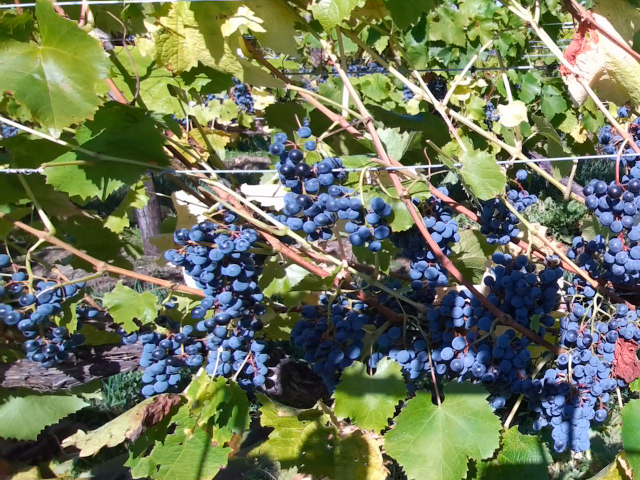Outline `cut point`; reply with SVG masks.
Here are the masks:
<instances>
[{"label": "cut point", "instance_id": "1", "mask_svg": "<svg viewBox=\"0 0 640 480\" xmlns=\"http://www.w3.org/2000/svg\"><path fill=\"white\" fill-rule=\"evenodd\" d=\"M104 274H105V271L103 269H99L94 274L80 275V276H77V277H72V278H68V279H65V280H61L59 282V285L61 287H67V286H70V285H75V284H79V283H83V282L96 281V280L100 279Z\"/></svg>", "mask_w": 640, "mask_h": 480}, {"label": "cut point", "instance_id": "2", "mask_svg": "<svg viewBox=\"0 0 640 480\" xmlns=\"http://www.w3.org/2000/svg\"><path fill=\"white\" fill-rule=\"evenodd\" d=\"M43 244L41 239H36L31 245H29L24 254V267L29 269L31 267V256L39 246Z\"/></svg>", "mask_w": 640, "mask_h": 480}, {"label": "cut point", "instance_id": "3", "mask_svg": "<svg viewBox=\"0 0 640 480\" xmlns=\"http://www.w3.org/2000/svg\"><path fill=\"white\" fill-rule=\"evenodd\" d=\"M341 288V286L335 284L333 290L328 294L327 300L329 302H333L335 300V297L339 294Z\"/></svg>", "mask_w": 640, "mask_h": 480}, {"label": "cut point", "instance_id": "4", "mask_svg": "<svg viewBox=\"0 0 640 480\" xmlns=\"http://www.w3.org/2000/svg\"><path fill=\"white\" fill-rule=\"evenodd\" d=\"M601 298H602V295L599 292L596 291L595 295H594V297L592 298V301H591V308L593 310H596L598 308V304H599V301L601 300Z\"/></svg>", "mask_w": 640, "mask_h": 480}, {"label": "cut point", "instance_id": "5", "mask_svg": "<svg viewBox=\"0 0 640 480\" xmlns=\"http://www.w3.org/2000/svg\"><path fill=\"white\" fill-rule=\"evenodd\" d=\"M500 319H501V316L499 315H496V317H494V320L490 324V332H486L485 336L491 335L492 337H495V333L493 332V327L496 324L497 320H500Z\"/></svg>", "mask_w": 640, "mask_h": 480}, {"label": "cut point", "instance_id": "6", "mask_svg": "<svg viewBox=\"0 0 640 480\" xmlns=\"http://www.w3.org/2000/svg\"><path fill=\"white\" fill-rule=\"evenodd\" d=\"M628 142V139H625L619 146V151H618V157L616 158V165H615V169H618L619 167V159H620V154L622 153V149L623 146L626 145V143Z\"/></svg>", "mask_w": 640, "mask_h": 480}]
</instances>
